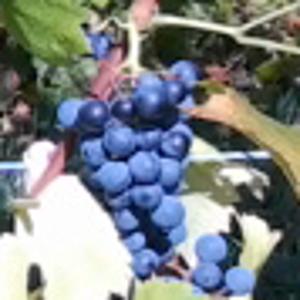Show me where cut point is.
I'll use <instances>...</instances> for the list:
<instances>
[{
    "mask_svg": "<svg viewBox=\"0 0 300 300\" xmlns=\"http://www.w3.org/2000/svg\"><path fill=\"white\" fill-rule=\"evenodd\" d=\"M127 33L129 43L126 45V66H132L139 69L138 49L141 40L140 27L137 25V15L128 12Z\"/></svg>",
    "mask_w": 300,
    "mask_h": 300,
    "instance_id": "1",
    "label": "cut point"
}]
</instances>
